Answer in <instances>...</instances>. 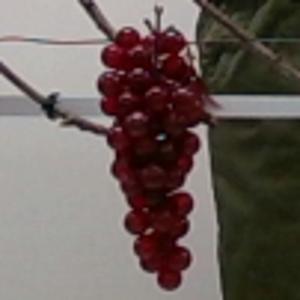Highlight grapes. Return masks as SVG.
Segmentation results:
<instances>
[{
  "instance_id": "1",
  "label": "grapes",
  "mask_w": 300,
  "mask_h": 300,
  "mask_svg": "<svg viewBox=\"0 0 300 300\" xmlns=\"http://www.w3.org/2000/svg\"><path fill=\"white\" fill-rule=\"evenodd\" d=\"M185 46L176 29L142 39L134 28H121L101 50V63L110 70L96 80L100 110L114 117L105 141L116 155L111 175L131 209L124 226L139 236L133 244L138 267L157 273V285L166 292L180 288L182 272L193 262L178 239L189 232L194 200L179 189L201 147L191 130L206 113V84L180 54Z\"/></svg>"
}]
</instances>
